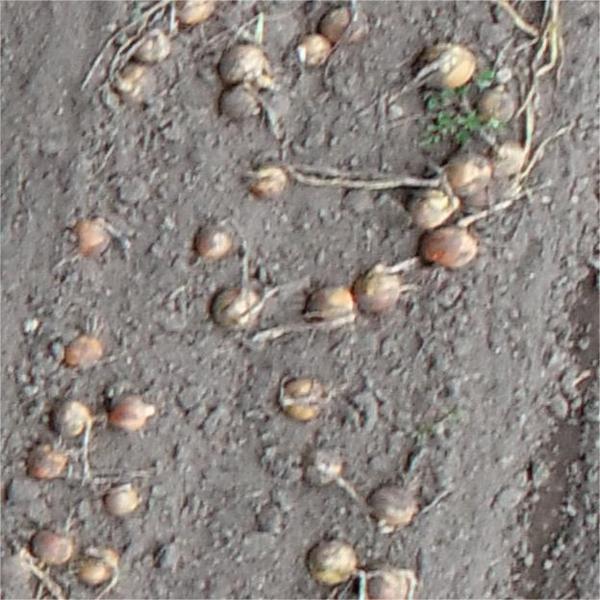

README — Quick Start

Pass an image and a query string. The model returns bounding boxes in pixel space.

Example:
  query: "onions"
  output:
[54,398,93,438]
[193,221,234,259]
[496,143,524,174]
[211,286,262,331]
[420,223,474,267]
[249,160,288,201]
[76,553,111,586]
[222,84,259,121]
[139,32,166,62]
[177,0,213,27]
[370,483,412,528]
[478,90,512,121]
[365,566,414,599]
[31,529,73,565]
[281,374,321,422]
[307,537,357,583]
[112,61,151,103]
[110,392,151,431]
[445,153,492,195]
[221,43,271,87]
[309,282,351,324]
[296,33,329,67]
[411,187,453,228]
[61,331,103,368]
[354,264,401,312]
[74,218,108,255]
[25,441,65,481]
[309,450,343,483]
[417,43,475,89]
[317,10,366,45]
[104,479,140,515]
